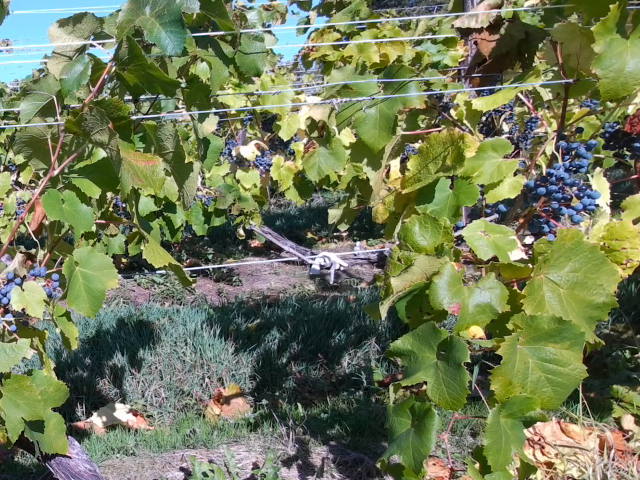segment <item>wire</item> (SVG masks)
<instances>
[{
	"instance_id": "1",
	"label": "wire",
	"mask_w": 640,
	"mask_h": 480,
	"mask_svg": "<svg viewBox=\"0 0 640 480\" xmlns=\"http://www.w3.org/2000/svg\"><path fill=\"white\" fill-rule=\"evenodd\" d=\"M581 78H558V79H550V80H528L525 82L518 83H500L495 85H489L485 87L479 88H465V89H442L433 92H401V93H390V94H381V95H370V96H359L355 98H346L341 100H315V101H299L293 103H266L261 105H246L240 107H225L218 109H207L201 111H187L181 113H161V114H152V115H136L132 116V121L138 120H154V119H163V118H184L189 116H203L209 114H220V113H228V112H243L248 110L260 111L268 108H295L301 106H317V105H343L348 103H357L361 101H372V100H383V99H392V98H403V97H435L444 94H467V93H481L487 92L491 90H497L502 88H520L527 87L530 85H552V84H560V83H581Z\"/></svg>"
},
{
	"instance_id": "2",
	"label": "wire",
	"mask_w": 640,
	"mask_h": 480,
	"mask_svg": "<svg viewBox=\"0 0 640 480\" xmlns=\"http://www.w3.org/2000/svg\"><path fill=\"white\" fill-rule=\"evenodd\" d=\"M575 3L564 4V5H556L550 7H540V6H523L518 8H493L488 10H476L469 12H451V13H429V14H420V15H406L399 16L394 18H379L373 20H356V21H324L318 23H302V24H294V25H280V26H245L234 29H218V30H206V31H198L194 33L195 37L200 36H209V35H220V34H236L247 31H282V30H296V29H304V28H320L326 26H359V25H375L381 23H396L401 21L408 20H423V19H431V18H453V17H471L478 15H490L495 13H520V12H528V11H538V12H552L558 10H566L575 8Z\"/></svg>"
},
{
	"instance_id": "3",
	"label": "wire",
	"mask_w": 640,
	"mask_h": 480,
	"mask_svg": "<svg viewBox=\"0 0 640 480\" xmlns=\"http://www.w3.org/2000/svg\"><path fill=\"white\" fill-rule=\"evenodd\" d=\"M457 37L456 33L443 34V35H422L412 34L405 36H389V37H376L367 38L363 40H345V41H332V42H317V43H297L293 45H266V50H295L299 48H319V47H334V46H347V45H365L369 43L379 42H391V41H407L412 39L420 40H446L454 39Z\"/></svg>"
},
{
	"instance_id": "4",
	"label": "wire",
	"mask_w": 640,
	"mask_h": 480,
	"mask_svg": "<svg viewBox=\"0 0 640 480\" xmlns=\"http://www.w3.org/2000/svg\"><path fill=\"white\" fill-rule=\"evenodd\" d=\"M300 260H301L300 256L280 257V258H272V259L221 263V264H214V265H208V266H185L184 270L185 271H210V270H216V269L234 268V267L250 266V265L274 264V263H282V262H298Z\"/></svg>"
},
{
	"instance_id": "5",
	"label": "wire",
	"mask_w": 640,
	"mask_h": 480,
	"mask_svg": "<svg viewBox=\"0 0 640 480\" xmlns=\"http://www.w3.org/2000/svg\"><path fill=\"white\" fill-rule=\"evenodd\" d=\"M115 42L114 38L110 39H97V40H86V41H70V42H46L40 44H29V45H0V50H31V49H42L48 47H72V46H88V45H99V44H113Z\"/></svg>"
},
{
	"instance_id": "6",
	"label": "wire",
	"mask_w": 640,
	"mask_h": 480,
	"mask_svg": "<svg viewBox=\"0 0 640 480\" xmlns=\"http://www.w3.org/2000/svg\"><path fill=\"white\" fill-rule=\"evenodd\" d=\"M63 120H41L26 124H0V129H28L43 125H63Z\"/></svg>"
},
{
	"instance_id": "7",
	"label": "wire",
	"mask_w": 640,
	"mask_h": 480,
	"mask_svg": "<svg viewBox=\"0 0 640 480\" xmlns=\"http://www.w3.org/2000/svg\"><path fill=\"white\" fill-rule=\"evenodd\" d=\"M389 247L388 246H382L379 248H369V249H363V250H358V251H340L337 250L336 251V255L337 256H360V255H365V254H371V253H381L384 251H388Z\"/></svg>"
},
{
	"instance_id": "8",
	"label": "wire",
	"mask_w": 640,
	"mask_h": 480,
	"mask_svg": "<svg viewBox=\"0 0 640 480\" xmlns=\"http://www.w3.org/2000/svg\"><path fill=\"white\" fill-rule=\"evenodd\" d=\"M173 273L172 269L168 270H150V271H137V272H127L121 273V278H130V277H139V276H152V275H171Z\"/></svg>"
},
{
	"instance_id": "9",
	"label": "wire",
	"mask_w": 640,
	"mask_h": 480,
	"mask_svg": "<svg viewBox=\"0 0 640 480\" xmlns=\"http://www.w3.org/2000/svg\"><path fill=\"white\" fill-rule=\"evenodd\" d=\"M47 62H48L47 58H32V59L11 60V61L0 60V65L1 66H13V65L47 63Z\"/></svg>"
}]
</instances>
